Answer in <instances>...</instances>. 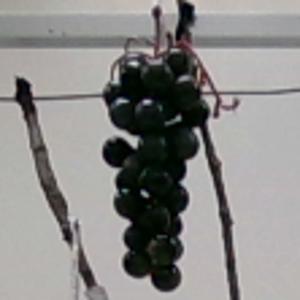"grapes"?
<instances>
[{
	"mask_svg": "<svg viewBox=\"0 0 300 300\" xmlns=\"http://www.w3.org/2000/svg\"><path fill=\"white\" fill-rule=\"evenodd\" d=\"M196 61L183 48L165 53L162 64L132 53L120 61L117 80L104 84L101 98L113 127L138 137L137 147L113 135L103 145L106 165L119 170L112 197L115 212L127 219L123 233L128 251L122 258L130 277H150L155 289L172 293L182 283L177 263L184 252L180 238L190 196L180 182L186 161L196 157L195 128L209 121L211 108L201 99L193 77Z\"/></svg>",
	"mask_w": 300,
	"mask_h": 300,
	"instance_id": "grapes-1",
	"label": "grapes"
}]
</instances>
